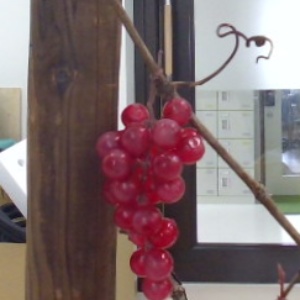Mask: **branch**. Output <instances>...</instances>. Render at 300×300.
Returning a JSON list of instances; mask_svg holds the SVG:
<instances>
[{"label":"branch","mask_w":300,"mask_h":300,"mask_svg":"<svg viewBox=\"0 0 300 300\" xmlns=\"http://www.w3.org/2000/svg\"><path fill=\"white\" fill-rule=\"evenodd\" d=\"M112 8L118 14L122 23L125 26L127 34L130 36L133 43L142 53L144 60L149 65L151 72L155 74L154 80L159 87V91H161L166 96V100H170L173 97H181V93L177 92L176 87H197L203 84H207L211 81L215 76L219 75L221 71L230 63L233 59L240 43V36L246 41V48H249L250 43L254 41V45L256 47H263L266 41L270 44V50L268 52V56L257 55L255 59V63H259V59L269 60L271 58V54L273 53V41L270 37L266 36H250L248 38L244 33L237 31L236 27L230 23H221L218 25L215 30V35L219 38H225L231 34H235L236 44L231 52L230 56L227 60L221 65L220 68L217 69L216 72L211 73L207 78H204L201 81L190 82V81H173L169 79L162 71V50H159L158 53V63L153 58L151 52L146 47V44L142 41L136 27L131 23L129 16H126V12L122 4L119 0H111Z\"/></svg>","instance_id":"1"},{"label":"branch","mask_w":300,"mask_h":300,"mask_svg":"<svg viewBox=\"0 0 300 300\" xmlns=\"http://www.w3.org/2000/svg\"><path fill=\"white\" fill-rule=\"evenodd\" d=\"M192 126L200 135L203 136L205 141L208 143L211 149H214L218 155L229 165L234 172L244 181L247 187L251 190L254 197L260 201L261 204L265 206L266 209L270 211L273 219L278 223L282 230L290 236L297 245H300V234L297 229H295L285 216L277 210L273 201L266 195V193L253 181V179L247 174V172L237 163V161L227 152L221 144L210 134V132L203 126L199 121L197 116H193L190 122Z\"/></svg>","instance_id":"2"},{"label":"branch","mask_w":300,"mask_h":300,"mask_svg":"<svg viewBox=\"0 0 300 300\" xmlns=\"http://www.w3.org/2000/svg\"><path fill=\"white\" fill-rule=\"evenodd\" d=\"M279 274H280V294L277 300H284L293 290V286L297 283V280L300 278V273L296 274L295 277L290 282L289 286L284 291V281L287 276V271L279 266Z\"/></svg>","instance_id":"3"}]
</instances>
